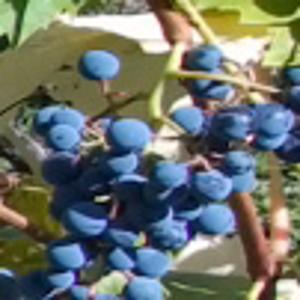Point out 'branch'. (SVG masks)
<instances>
[{
  "label": "branch",
  "mask_w": 300,
  "mask_h": 300,
  "mask_svg": "<svg viewBox=\"0 0 300 300\" xmlns=\"http://www.w3.org/2000/svg\"><path fill=\"white\" fill-rule=\"evenodd\" d=\"M228 203L240 232L241 247L247 256L246 272L253 280V294L258 300H274L280 264L258 208L247 194L241 192L231 193Z\"/></svg>",
  "instance_id": "1"
},
{
  "label": "branch",
  "mask_w": 300,
  "mask_h": 300,
  "mask_svg": "<svg viewBox=\"0 0 300 300\" xmlns=\"http://www.w3.org/2000/svg\"><path fill=\"white\" fill-rule=\"evenodd\" d=\"M0 220L12 228L23 232L39 246L47 244V239L37 231V227L23 213L5 203H0Z\"/></svg>",
  "instance_id": "3"
},
{
  "label": "branch",
  "mask_w": 300,
  "mask_h": 300,
  "mask_svg": "<svg viewBox=\"0 0 300 300\" xmlns=\"http://www.w3.org/2000/svg\"><path fill=\"white\" fill-rule=\"evenodd\" d=\"M152 10L156 22L172 50H189L195 42V32L178 13L173 3L167 0H144Z\"/></svg>",
  "instance_id": "2"
}]
</instances>
